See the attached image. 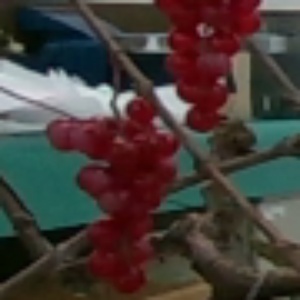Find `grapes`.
<instances>
[{
	"mask_svg": "<svg viewBox=\"0 0 300 300\" xmlns=\"http://www.w3.org/2000/svg\"><path fill=\"white\" fill-rule=\"evenodd\" d=\"M125 113L117 120L55 117L46 133L54 150L90 158L77 169L75 180L107 213L87 231L93 249L85 260L88 274L131 294L147 283L146 264L155 249L143 239L154 227L152 215L167 195V183L177 174L170 159L178 153L181 138L172 129L153 127L156 108L146 96L130 99Z\"/></svg>",
	"mask_w": 300,
	"mask_h": 300,
	"instance_id": "obj_1",
	"label": "grapes"
},
{
	"mask_svg": "<svg viewBox=\"0 0 300 300\" xmlns=\"http://www.w3.org/2000/svg\"><path fill=\"white\" fill-rule=\"evenodd\" d=\"M264 0H155L157 9L176 22L167 41L174 50L166 60L167 75L177 81L189 125L206 132L217 123V108L228 100L222 79L233 71L244 35L262 26Z\"/></svg>",
	"mask_w": 300,
	"mask_h": 300,
	"instance_id": "obj_2",
	"label": "grapes"
}]
</instances>
